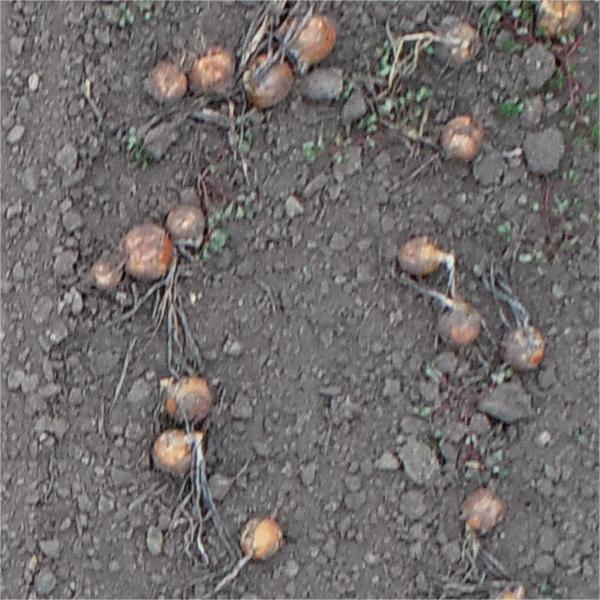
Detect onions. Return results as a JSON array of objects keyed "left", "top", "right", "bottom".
[
  {"left": 463, "top": 489, "right": 506, "bottom": 533},
  {"left": 121, "top": 224, "right": 173, "bottom": 280},
  {"left": 153, "top": 429, "right": 197, "bottom": 472},
  {"left": 161, "top": 375, "right": 211, "bottom": 421},
  {"left": 439, "top": 116, "right": 481, "bottom": 161},
  {"left": 90, "top": 253, "right": 122, "bottom": 288},
  {"left": 165, "top": 204, "right": 204, "bottom": 246},
  {"left": 285, "top": 14, "right": 337, "bottom": 62},
  {"left": 191, "top": 49, "right": 233, "bottom": 94},
  {"left": 246, "top": 59, "right": 292, "bottom": 105},
  {"left": 439, "top": 305, "right": 481, "bottom": 346},
  {"left": 146, "top": 62, "right": 184, "bottom": 101},
  {"left": 447, "top": 33, "right": 476, "bottom": 64},
  {"left": 493, "top": 580, "right": 525, "bottom": 599},
  {"left": 499, "top": 325, "right": 546, "bottom": 368},
  {"left": 399, "top": 235, "right": 447, "bottom": 277},
  {"left": 539, "top": 0, "right": 588, "bottom": 38},
  {"left": 239, "top": 515, "right": 282, "bottom": 558}
]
